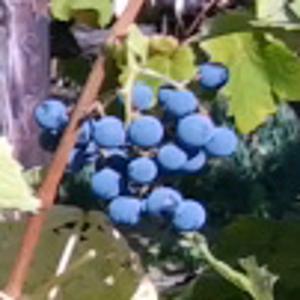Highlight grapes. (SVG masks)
<instances>
[{"mask_svg": "<svg viewBox=\"0 0 300 300\" xmlns=\"http://www.w3.org/2000/svg\"><path fill=\"white\" fill-rule=\"evenodd\" d=\"M130 100L139 112L103 115L85 120L68 158L74 173L93 166L90 189L106 203V217L115 227H137L144 216L168 218L179 234L203 233L209 222L208 204L185 197L168 176H199L209 157H229L239 136L198 110V98L175 84H162L153 94L144 80L131 86Z\"/></svg>", "mask_w": 300, "mask_h": 300, "instance_id": "grapes-1", "label": "grapes"}, {"mask_svg": "<svg viewBox=\"0 0 300 300\" xmlns=\"http://www.w3.org/2000/svg\"><path fill=\"white\" fill-rule=\"evenodd\" d=\"M35 125L41 129L39 145L45 151L54 150L68 123L69 110L60 99H42L32 108Z\"/></svg>", "mask_w": 300, "mask_h": 300, "instance_id": "grapes-2", "label": "grapes"}, {"mask_svg": "<svg viewBox=\"0 0 300 300\" xmlns=\"http://www.w3.org/2000/svg\"><path fill=\"white\" fill-rule=\"evenodd\" d=\"M198 87L204 91H213L225 86L230 80V71L222 63L204 61L196 68Z\"/></svg>", "mask_w": 300, "mask_h": 300, "instance_id": "grapes-3", "label": "grapes"}]
</instances>
